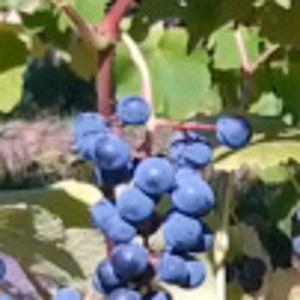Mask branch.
<instances>
[{
	"label": "branch",
	"instance_id": "branch-1",
	"mask_svg": "<svg viewBox=\"0 0 300 300\" xmlns=\"http://www.w3.org/2000/svg\"><path fill=\"white\" fill-rule=\"evenodd\" d=\"M137 0H108L99 19L96 33L95 85L99 114L109 116L115 110L112 65L117 42L118 24L124 13L135 9Z\"/></svg>",
	"mask_w": 300,
	"mask_h": 300
}]
</instances>
